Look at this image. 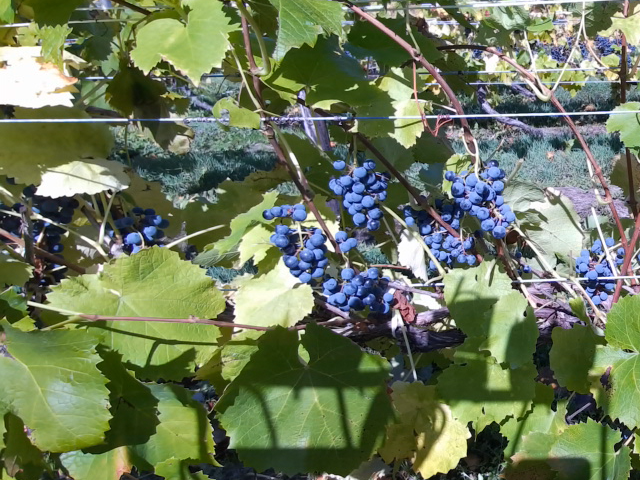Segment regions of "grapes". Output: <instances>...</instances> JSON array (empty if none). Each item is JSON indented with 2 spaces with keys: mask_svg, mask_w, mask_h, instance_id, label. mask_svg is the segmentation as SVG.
Wrapping results in <instances>:
<instances>
[{
  "mask_svg": "<svg viewBox=\"0 0 640 480\" xmlns=\"http://www.w3.org/2000/svg\"><path fill=\"white\" fill-rule=\"evenodd\" d=\"M480 180L476 173L462 171L455 174L453 171L445 173V179L452 181L451 194L454 196V204L446 205L442 199L435 201L436 209L443 213L441 217L448 222L455 230L460 228V219L464 217L465 210L472 217L481 220V228L473 231L472 235H467L465 240H459L454 235H449L443 226H432L433 217L428 215L424 209H404V224L413 227L416 223L419 226V233L423 236V241L431 245L432 255L445 264L465 263L467 266H475L477 259L471 253H466L474 246V237L480 239L484 236V231H491L494 239H503L506 236V228L509 223L516 220L515 213L508 205H504V182L505 170L498 168L496 160L488 162V168L481 170ZM493 202L496 211L503 217L494 219L490 217V211L481 204Z\"/></svg>",
  "mask_w": 640,
  "mask_h": 480,
  "instance_id": "1",
  "label": "grapes"
},
{
  "mask_svg": "<svg viewBox=\"0 0 640 480\" xmlns=\"http://www.w3.org/2000/svg\"><path fill=\"white\" fill-rule=\"evenodd\" d=\"M376 162L366 159L363 166H357L353 174L343 175L339 179L330 178L327 188L335 195L343 196L342 207L347 209L350 220L357 226L370 231H378L382 226L383 210L380 203L388 200L387 189L390 174L372 171Z\"/></svg>",
  "mask_w": 640,
  "mask_h": 480,
  "instance_id": "2",
  "label": "grapes"
},
{
  "mask_svg": "<svg viewBox=\"0 0 640 480\" xmlns=\"http://www.w3.org/2000/svg\"><path fill=\"white\" fill-rule=\"evenodd\" d=\"M377 267H367L358 273L352 268H343L341 278L348 280L340 285L338 279L326 275L321 283L322 293L328 295V302L332 307H338L342 312L370 311L388 315L394 305V298L386 293L391 288L389 277H379Z\"/></svg>",
  "mask_w": 640,
  "mask_h": 480,
  "instance_id": "3",
  "label": "grapes"
},
{
  "mask_svg": "<svg viewBox=\"0 0 640 480\" xmlns=\"http://www.w3.org/2000/svg\"><path fill=\"white\" fill-rule=\"evenodd\" d=\"M302 236L305 240L304 247L297 255L294 254L296 246L300 243V236L285 224L275 227L270 242L276 244L284 253L281 263L289 269V274L302 283H309L312 277L323 276L328 267V258L323 256L327 253V246L324 244L326 237L318 227L305 228Z\"/></svg>",
  "mask_w": 640,
  "mask_h": 480,
  "instance_id": "4",
  "label": "grapes"
},
{
  "mask_svg": "<svg viewBox=\"0 0 640 480\" xmlns=\"http://www.w3.org/2000/svg\"><path fill=\"white\" fill-rule=\"evenodd\" d=\"M590 263V251L588 249H582L580 251V257L575 259V273L583 274V277L589 278L588 282H584L588 283L586 285L585 293L589 296L594 305H599L601 302H606L608 300V294L606 292L596 294L595 290L598 288V285L604 286L607 292H612L615 288L616 282H601L597 280V277H609L614 276L615 274H613V269L610 267L607 259H602L600 261V265H593Z\"/></svg>",
  "mask_w": 640,
  "mask_h": 480,
  "instance_id": "5",
  "label": "grapes"
},
{
  "mask_svg": "<svg viewBox=\"0 0 640 480\" xmlns=\"http://www.w3.org/2000/svg\"><path fill=\"white\" fill-rule=\"evenodd\" d=\"M132 214L135 217L144 216L141 220L143 225L141 235L138 232H130L124 236V245L130 247L132 253H138L141 250L142 237L147 243L157 242L165 237V232L161 229L169 226L166 218H162L151 208L135 207Z\"/></svg>",
  "mask_w": 640,
  "mask_h": 480,
  "instance_id": "6",
  "label": "grapes"
},
{
  "mask_svg": "<svg viewBox=\"0 0 640 480\" xmlns=\"http://www.w3.org/2000/svg\"><path fill=\"white\" fill-rule=\"evenodd\" d=\"M262 217L266 221H273L274 219H283L287 217L292 218L296 222H305L307 220V212L302 203H294L292 205L264 208L262 210Z\"/></svg>",
  "mask_w": 640,
  "mask_h": 480,
  "instance_id": "7",
  "label": "grapes"
},
{
  "mask_svg": "<svg viewBox=\"0 0 640 480\" xmlns=\"http://www.w3.org/2000/svg\"><path fill=\"white\" fill-rule=\"evenodd\" d=\"M335 243L338 250L342 253H348L350 250L358 247V242L355 238H349V234L346 231H338L335 234Z\"/></svg>",
  "mask_w": 640,
  "mask_h": 480,
  "instance_id": "8",
  "label": "grapes"
},
{
  "mask_svg": "<svg viewBox=\"0 0 640 480\" xmlns=\"http://www.w3.org/2000/svg\"><path fill=\"white\" fill-rule=\"evenodd\" d=\"M523 272H524V273H526V274H531V273H532V269H531V267H530L528 264H524V265H523ZM523 272L521 271V269H520V268H517V269H516V273H517V275H518L519 277H522V276H523Z\"/></svg>",
  "mask_w": 640,
  "mask_h": 480,
  "instance_id": "9",
  "label": "grapes"
}]
</instances>
